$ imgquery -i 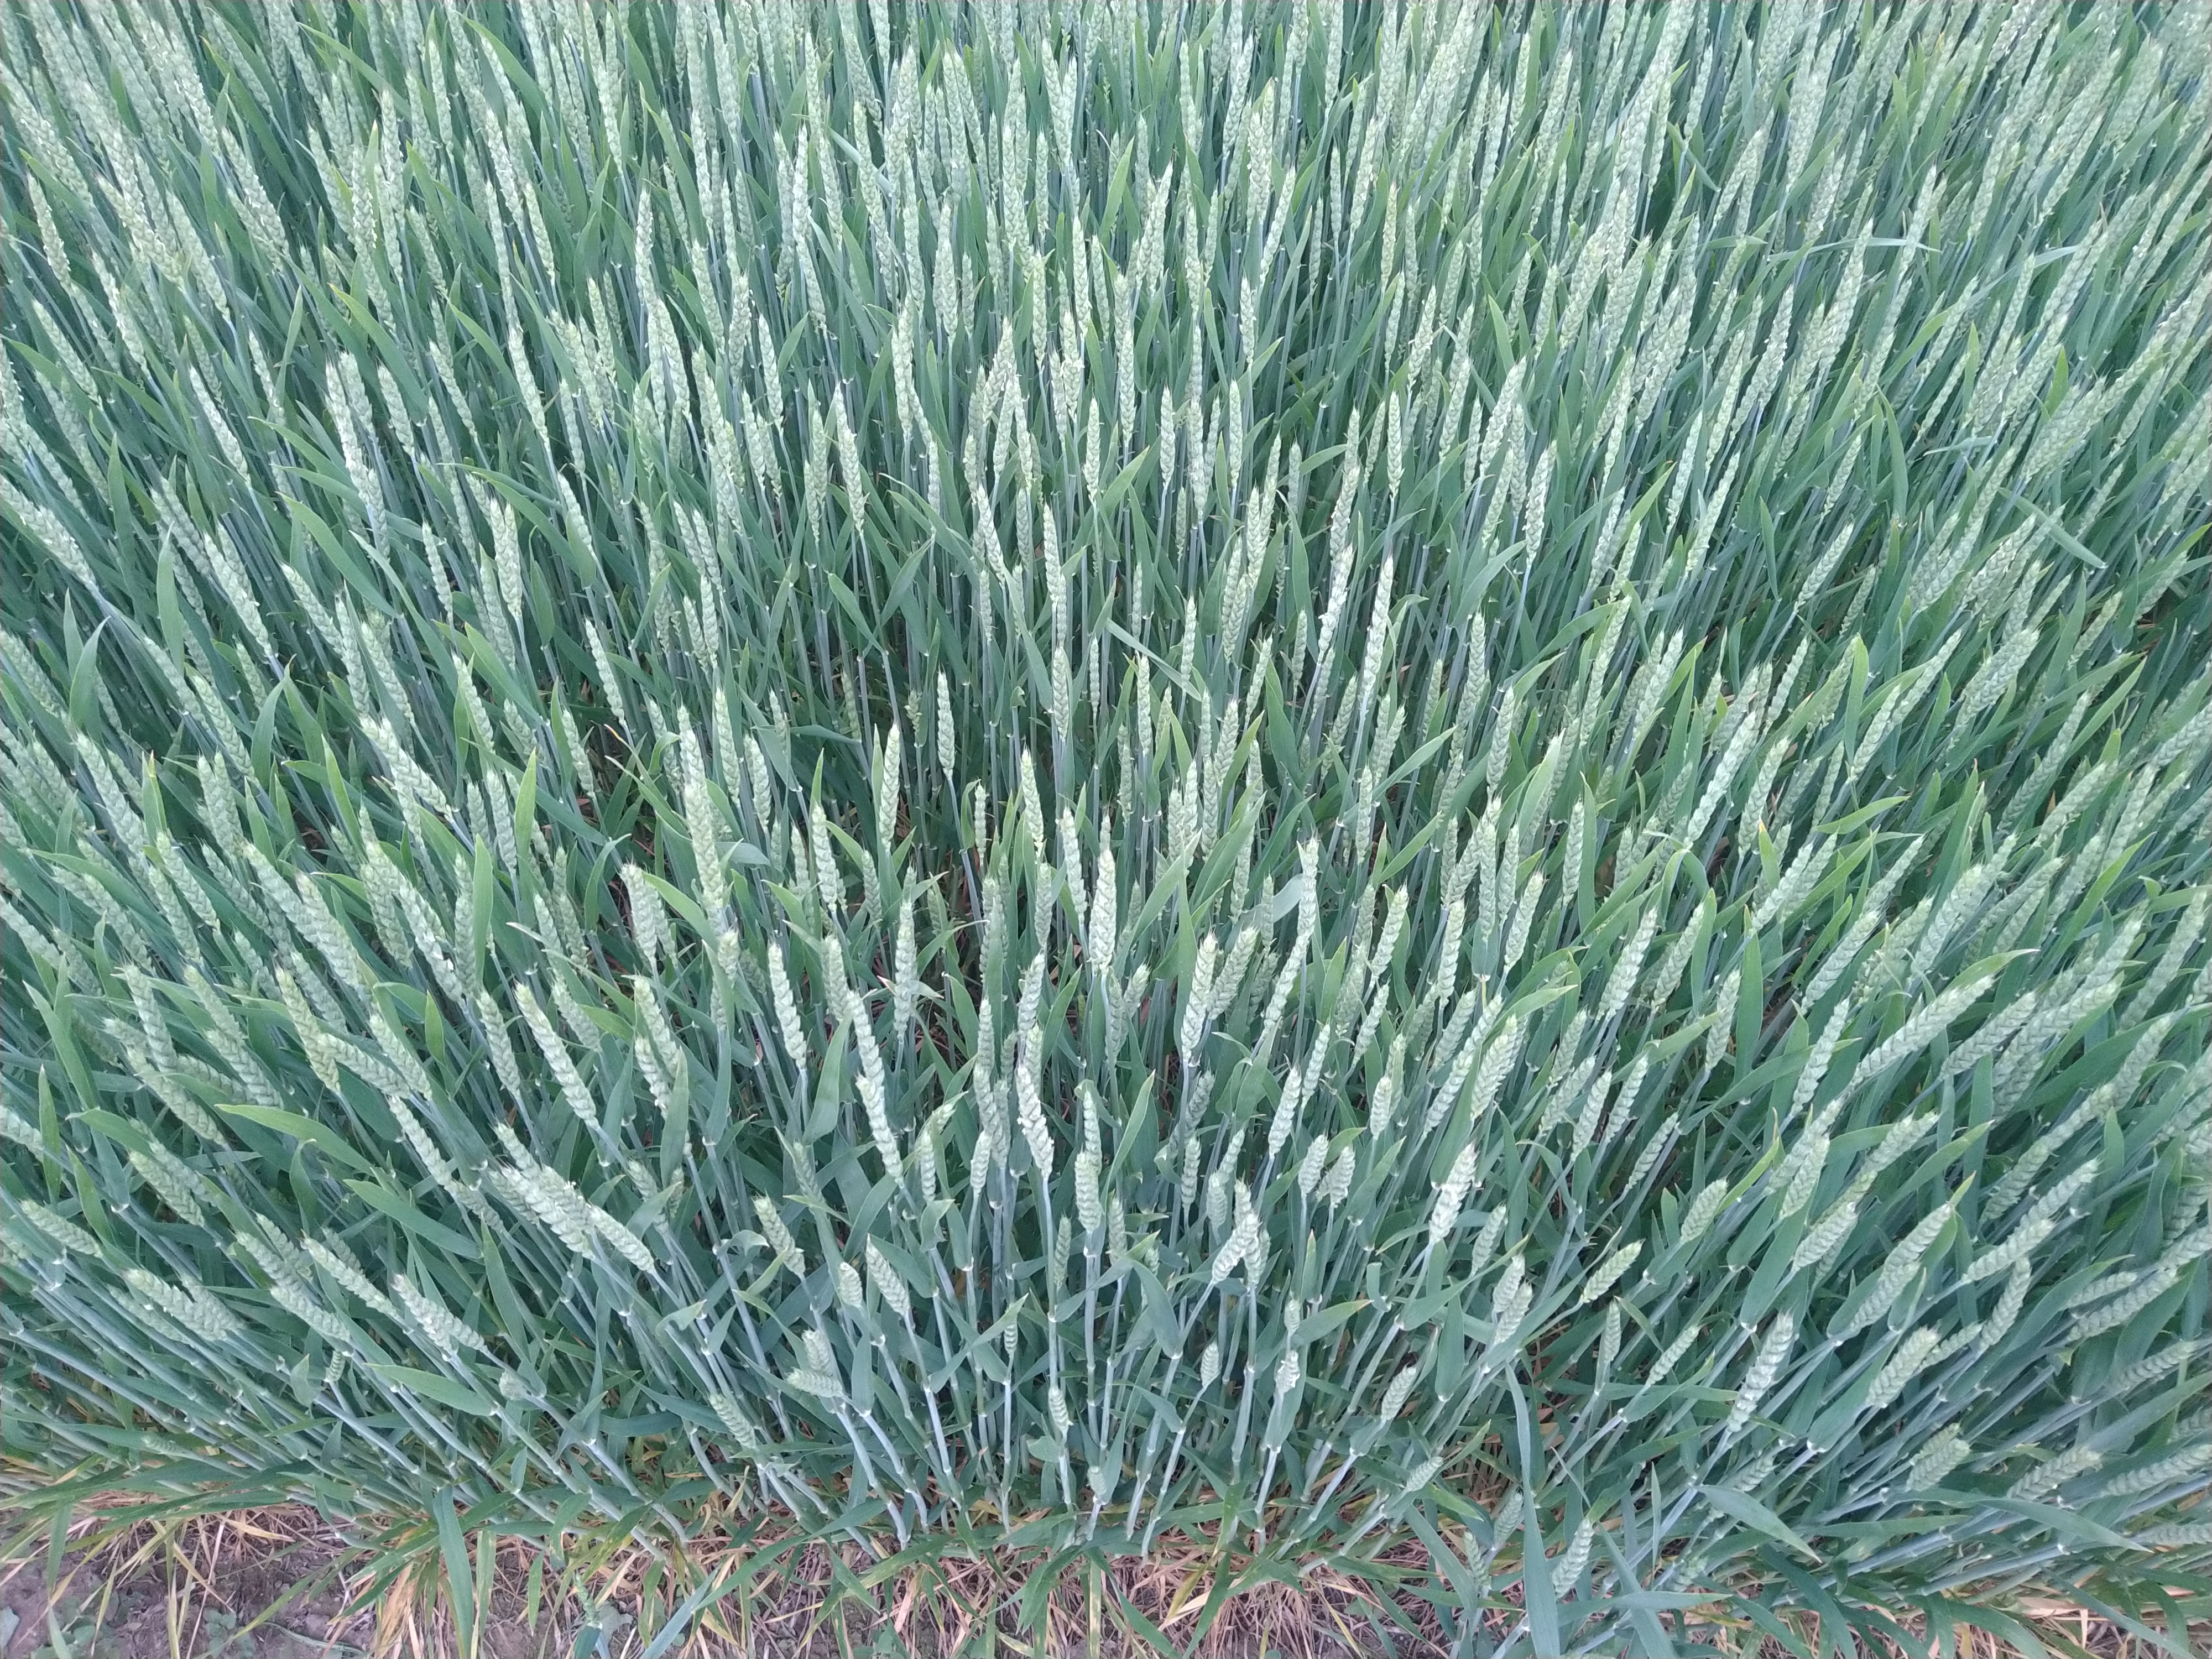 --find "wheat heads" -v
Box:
[0,634,66,716]
[348,105,364,153]
[352,151,375,248]
[903,154,917,206]
[205,1033,285,1110]
[879,724,901,845]
[1352,885,1376,961]
[2015,510,2064,566]
[422,523,453,612]
[561,37,585,113]
[1962,634,2040,722]
[1790,56,1812,143]
[1124,0,1138,33]
[227,192,282,269]
[1138,657,1152,751]
[1288,444,1301,511]
[1569,423,1583,458]
[1479,825,1498,934]
[198,757,236,856]
[1529,180,1548,231]
[331,286,352,322]
[1168,791,1183,863]
[419,1299,486,1347]
[1472,1205,1507,1274]
[1449,307,1474,386]
[505,775,556,866]
[2090,653,2133,696]
[1480,361,1525,469]
[1992,887,2047,955]
[1500,1015,1517,1067]
[1907,515,1958,590]
[1953,300,1985,338]
[909,20,919,61]
[2078,922,2142,995]
[1910,48,1951,139]
[1333,1147,1356,1205]
[125,1047,164,1079]
[1439,1,1464,45]
[244,846,317,941]
[489,499,510,600]
[1298,839,1320,938]
[1593,358,1633,444]
[1469,614,1487,705]
[2004,120,2048,211]
[1351,118,1378,228]
[2002,561,2041,643]
[1686,714,1760,843]
[804,462,819,532]
[927,888,942,936]
[190,372,251,484]
[1652,906,1705,1004]
[1161,166,1173,199]
[776,245,801,284]
[584,620,625,722]
[820,938,831,1006]
[994,381,1014,472]
[105,1020,156,1056]
[1823,435,1862,512]
[380,0,399,36]
[483,783,500,866]
[5,102,51,169]
[551,46,576,138]
[125,1,168,70]
[664,165,690,245]
[268,4,289,85]
[1767,1101,1844,1188]
[0,722,38,769]
[2001,146,2020,182]
[1292,1,1308,68]
[1089,818,1117,973]
[1346,409,1360,470]
[1725,2,1744,70]
[1510,34,1531,126]
[1345,86,1367,172]
[36,374,113,503]
[2163,446,2212,499]
[1750,847,1815,931]
[928,441,941,515]
[1510,0,1525,33]
[430,42,453,144]
[718,932,740,981]
[1498,825,1520,921]
[488,773,517,871]
[1329,468,1360,561]
[467,784,490,845]
[2192,808,2212,841]
[1246,486,1261,565]
[408,207,447,297]
[1043,504,1061,598]
[1404,74,1417,131]
[1587,61,1624,147]
[1017,955,1046,1046]
[739,949,767,994]
[1100,13,1112,53]
[977,367,987,400]
[1382,1367,1418,1420]
[271,464,316,551]
[1833,129,1867,215]
[272,1289,352,1341]
[1083,1091,1102,1175]
[557,476,599,563]
[340,354,374,432]
[1087,1468,1105,1496]
[1684,46,1714,134]
[819,907,836,936]
[1223,105,1250,201]
[0,1238,25,1267]
[1463,400,1482,487]
[2069,764,2118,818]
[1321,0,1332,39]
[1907,818,1950,873]
[2111,1016,2174,1110]
[595,359,614,415]
[1190,1,1203,43]
[998,854,1010,913]
[2035,767,2116,843]
[627,1161,667,1232]
[402,0,421,78]
[440,166,457,229]
[892,332,910,428]
[1202,1344,1220,1384]
[1117,724,1127,762]
[1605,1300,1621,1360]
[32,303,99,398]
[1049,1388,1068,1429]
[1390,71,1407,148]
[1109,1198,1127,1263]
[44,18,102,145]
[980,570,993,638]
[833,387,847,479]
[1424,361,1442,438]
[1752,825,1790,909]
[1660,196,1686,247]
[1738,741,1789,853]
[2101,772,2156,874]
[429,344,477,436]
[149,869,202,963]
[669,403,681,466]
[1510,484,1530,516]
[1293,611,1307,683]
[2067,1272,2181,1341]
[2166,788,2212,840]
[829,938,848,1021]
[953,55,982,153]
[322,247,342,290]
[1706,970,1741,1067]
[1420,660,1443,741]
[742,393,764,480]
[2155,274,2212,354]
[1923,1324,1982,1367]
[839,1263,863,1305]
[1993,1053,2045,1118]
[1458,143,1470,203]
[577,115,596,195]
[1703,1454,1774,1522]
[524,184,555,274]
[793,1143,825,1205]
[812,804,837,904]
[677,707,707,795]
[1404,985,1438,1044]
[780,1,794,51]
[143,641,210,729]
[446,6,481,87]
[1180,43,1194,139]
[2129,1522,2212,1544]
[145,1076,230,1145]
[1257,174,1271,221]
[225,1165,254,1207]
[2083,0,2114,82]
[1795,1203,1858,1266]
[1919,353,1969,430]
[140,127,173,176]
[1279,52,1294,134]
[1652,817,1687,881]
[1004,60,1022,129]
[1580,654,1610,743]
[336,246,356,280]
[455,897,478,994]
[1084,1,1104,67]
[767,945,810,1056]
[1708,239,1747,315]
[205,532,274,654]
[716,484,729,545]
[561,711,594,793]
[1231,0,1241,82]
[819,141,843,240]
[937,204,949,250]
[508,327,548,440]
[1109,133,1120,187]
[1700,672,1722,733]
[579,317,598,368]
[1610,522,1642,600]
[2167,130,2210,201]
[1135,0,1147,42]
[540,1177,593,1233]
[163,1,197,74]
[129,1154,203,1224]
[1878,904,1932,961]
[899,294,913,373]
[1249,953,1279,1016]
[77,840,124,879]
[426,211,440,239]
[0,901,71,972]
[1681,1180,1729,1242]
[2016,24,2059,116]
[1090,638,1100,711]
[1001,1,1015,66]
[699,64,717,144]
[1269,1069,1303,1153]
[1788,308,1832,405]
[1313,648,1337,715]
[1514,1017,1528,1064]
[1371,888,1409,976]
[1091,237,1110,337]
[665,590,682,634]
[1890,362,1927,411]
[787,1371,845,1396]
[2153,465,2208,540]
[814,0,832,61]
[2040,838,2103,939]
[318,312,334,340]
[1914,550,1950,602]
[354,973,374,1008]
[100,0,168,119]
[0,423,28,463]
[574,1574,598,1625]
[342,502,370,548]
[1324,1,1344,103]
[1721,42,1751,120]
[111,131,146,217]
[1808,154,1833,221]
[1548,1010,1587,1083]
[1401,49,1446,148]
[198,278,214,315]
[978,999,995,1072]
[1054,1216,1072,1284]
[1961,1223,2056,1283]
[515,987,596,1120]
[2161,391,2211,455]
[1210,8,1224,78]
[1728,1315,1796,1430]
[1779,836,1839,920]
[1811,31,1841,88]
[1731,352,1771,433]
[874,0,890,65]
[1694,0,1710,62]
[1994,987,2121,1069]
[975,785,987,860]
[107,751,145,810]
[1181,597,1197,686]
[1549,163,1567,258]
[552,848,568,940]
[536,1,554,39]
[0,802,35,861]
[1562,681,1580,729]
[61,377,84,433]
[179,0,198,42]
[1204,399,1221,485]
[1912,837,2015,973]
[682,2,701,121]
[1831,265,1865,362]
[846,38,882,122]
[1921,177,1946,234]
[533,896,566,1014]
[1823,223,1874,350]
[673,502,703,574]
[982,320,1015,420]
[292,955,349,1031]
[1646,1327,1699,1392]
[560,896,587,969]
[1977,861,2064,927]
[908,0,915,33]
[143,1137,217,1202]
[933,250,944,313]
[1511,405,1527,514]
[657,301,690,410]
[1596,911,1659,1018]
[1587,485,1626,588]
[1861,9,1890,64]
[757,416,783,494]
[170,547,205,618]
[325,367,367,499]
[1773,394,1811,478]
[565,1,585,53]
[708,448,742,532]
[1636,321,1691,423]
[979,880,1008,984]
[1569,232,1602,300]
[942,242,958,335]
[44,3,86,77]
[406,0,426,53]
[635,1039,672,1118]
[1061,808,1086,919]
[1648,82,1671,187]
[1974,338,2023,422]
[2163,290,2195,336]
[1533,897,1561,964]
[1041,41,1067,158]
[1136,117,1150,218]
[1155,850,1166,887]
[1925,283,1975,372]
[1436,0,1468,85]
[1481,450,1514,543]
[2041,67,2071,119]
[1790,1002,1851,1115]
[735,170,755,251]
[1881,1207,1952,1278]
[1678,214,1700,290]
[1657,764,1693,827]
[2167,236,2211,302]
[1117,965,1150,1047]
[1300,734,1310,772]
[1160,388,1176,481]
[1002,128,1017,242]
[909,52,922,145]
[1560,247,1605,345]
[1375,707,1406,784]
[2163,42,2210,104]
[1364,402,1386,478]
[1769,0,1805,92]
[1302,1023,1331,1102]
[1357,766,1374,859]
[1594,766,1614,809]
[478,992,521,1092]
[183,316,224,403]
[382,720,423,846]
[2181,1121,2212,1156]
[1570,29,1583,79]
[2002,0,2058,75]
[368,901,394,955]
[1997,258,2036,348]
[989,114,999,187]
[219,524,247,598]
[484,103,523,221]
[93,668,127,741]
[1391,8,1413,100]
[1965,298,2016,420]
[1549,719,1581,801]
[1016,1067,1049,1176]
[1085,399,1101,493]
[555,1093,598,1128]
[1986,2,2027,66]
[45,507,89,581]
[72,287,123,374]
[1940,996,2037,1076]
[1035,134,1049,230]
[222,130,289,254]
[454,64,485,132]
[2150,1093,2212,1144]
[1867,1329,1939,1405]
[1260,436,1282,538]
[1872,4,1920,98]
[1182,1139,1201,1206]
[491,1171,534,1224]
[2078,462,2125,532]
[1793,529,1817,581]
[1480,90,1507,203]
[862,852,882,923]
[308,130,355,237]
[1628,1113,1679,1187]
[214,754,246,855]
[1850,978,1995,1084]
[1377,8,1398,114]
[75,738,147,851]
[0,6,32,88]
[1552,1519,1595,1598]
[1071,0,1080,52]
[1604,181,1621,220]
[1908,1441,1970,1491]
[2162,681,2201,721]
[608,464,624,517]
[1496,1285,1533,1344]
[1121,744,1133,810]
[1861,840,1924,913]
[1108,983,1124,1056]
[1287,1299,1300,1327]
[1623,14,1651,96]
[1367,697,1391,770]
[2176,165,2212,220]
[316,1,338,36]
[736,2,758,66]
[1132,562,1143,637]
[972,1131,992,1190]
[964,434,977,498]
[1641,242,1672,328]
[2106,200,2147,261]
[1445,803,1501,902]
[1371,1078,1392,1134]
[2099,80,2123,120]
[773,133,795,190]
[1012,566,1024,632]
[1618,0,1642,57]
[1052,649,1069,736]
[1861,1116,1939,1174]
[1456,26,1486,108]
[634,981,679,1079]
[360,721,449,811]
[2047,55,2121,155]
[1626,169,1639,242]
[603,272,623,340]
[1978,568,2016,629]
[1539,1059,1596,1131]
[32,67,57,128]
[1962,630,2031,699]
[2011,412,2038,452]
[1435,992,1476,1066]
[796,238,826,327]
[1050,353,1067,435]
[1849,687,1900,778]
[2168,415,2211,477]
[1016,94,1028,192]
[2045,1086,2115,1151]
[481,38,529,137]
[879,126,894,172]
[398,328,420,371]
[84,877,153,967]
[236,644,267,712]
[705,376,730,466]
[248,332,285,424]
[986,209,999,279]
[303,1240,399,1317]
[1797,307,1826,368]
[28,177,73,292]
[691,352,711,439]
[53,930,107,999]
[519,1,553,105]
[1639,943,1675,997]
[1075,1153,1101,1228]
[842,26,867,110]
[1773,212,1787,254]
[790,827,815,929]
[361,866,414,967]
[1427,78,1457,155]
[1176,120,1205,208]
[1968,118,2010,236]
[1807,0,1824,58]
[465,473,492,522]
[1410,122,1427,173]
[978,140,991,205]
[2066,758,2088,795]
[122,287,168,352]
[143,1436,192,1456]
[1545,691,1568,746]
[396,1277,456,1354]
[97,182,183,282]
[838,0,854,36]
[771,822,782,869]
[587,278,616,378]
[1388,1037,1406,1115]
[1127,882,1142,935]
[550,1,571,38]
[176,1054,254,1102]
[1405,207,1419,299]
[942,56,973,198]
[377,366,414,451]
[1763,639,1809,730]
[281,568,345,655]
[967,395,983,451]
[780,193,795,244]
[1250,483,1277,584]
[2013,346,2063,425]
[2104,49,2160,143]
[758,0,773,68]
[1811,741,1844,832]
[1020,751,1044,842]
[1615,828,1634,888]
[917,152,940,228]
[1065,58,1078,133]
[1058,269,1071,331]
[129,246,175,349]
[1887,636,1963,735]
[150,490,192,565]
[1524,450,1549,564]
[1976,303,1999,365]
[174,50,220,155]
[1840,567,1877,634]
[1661,1558,1708,1592]
[678,713,725,906]
[743,736,753,781]
[1449,684,1471,763]
[1387,392,1402,491]
[712,151,722,234]
[184,968,251,1048]
[2079,809,2114,883]
[1162,0,1175,36]
[552,174,573,227]
[2104,1342,2205,1394]
[804,34,822,140]
[2008,1448,2102,1498]
[1439,242,1465,323]
[2068,592,2122,666]
[1471,1037,1506,1116]
[1782,1138,1830,1216]
[1063,314,1080,412]
[1612,70,1658,175]
[724,11,739,83]
[1215,702,1239,782]
[1603,239,1651,322]
[605,14,618,104]
[0,754,62,828]
[2060,1268,2135,1308]
[1863,42,1891,95]
[2133,551,2189,618]
[1603,399,1630,482]
[1191,327,1203,404]
[1464,1532,1490,1584]
[1814,1171,1876,1226]
[374,165,402,274]
[1430,1145,1478,1242]
[700,577,719,653]
[2051,229,2107,324]
[1856,332,1896,411]
[841,672,861,741]
[849,263,862,302]
[1651,3,1680,97]
[1854,293,1880,349]
[1606,192,1629,286]
[30,748,92,832]
[359,807,380,853]
[1670,0,1692,63]
[2039,121,2102,220]
[709,1395,755,1450]
[1229,828,1253,920]
[1599,597,1632,659]
[1031,435,1043,502]
[1557,226,1586,277]
[1014,379,1032,483]
[256,1214,313,1278]
[0,861,24,898]
[2158,1225,2212,1269]
[1422,1041,1476,1132]
[1334,969,1366,1037]
[1084,151,1094,185]
[1677,17,1696,52]
[758,315,784,422]
[1876,519,1897,578]
[1407,1457,1445,1491]
[1033,0,1051,33]
[1121,41,1131,107]
[1569,144,1600,219]
[1120,332,1135,439]
[123,968,178,1074]
[1437,755,1464,823]
[802,1331,833,1375]
[1542,962,1569,1018]
[1607,1059,1649,1139]
[1204,190,1219,277]
[1994,763,2049,841]
[1548,15,1574,82]
[2143,212,2186,277]
[753,1198,805,1273]
[321,95,353,184]
[232,976,259,1009]
[33,744,70,798]
[182,1276,245,1329]
[1607,268,1642,352]
[431,299,453,366]
[1321,677,1357,775]
[893,902,918,1032]
[696,15,709,47]
[1836,58,1867,122]
[551,313,566,385]
[1137,187,1157,280]
[2186,1356,2212,1378]
[277,972,340,1091]
[2110,369,2165,452]
[1544,439,1555,487]
[0,1224,32,1259]
[1489,537,1499,564]
[1057,574,1067,647]
[683,597,708,664]
[1962,519,2036,600]
[1613,0,1627,36]
[1001,1032,1017,1086]
[1036,483,1044,509]
[620,866,657,958]
[1742,296,1763,363]
[1058,0,1072,28]
[1259,1229,1271,1272]
[172,75,192,116]
[890,61,899,103]
[1264,936,1308,1031]
[322,1228,364,1274]
[2116,892,2209,1033]
[1073,219,1090,330]
[855,1078,905,1186]
[1706,291,1738,363]
[1914,522,1984,607]
[336,598,370,716]
[498,1123,545,1193]
[1471,998,1504,1049]
[648,317,666,423]
[2046,961,2091,1007]
[135,157,182,256]
[506,127,529,189]
[1977,1260,2032,1351]
[1202,761,1219,858]
[73,26,120,126]
[1705,361,1743,468]
[661,110,680,155]
[1440,818,1459,901]
[1753,666,1773,729]
[551,969,566,1037]
[1493,1256,1525,1311]
[691,112,712,224]
[659,212,676,290]
[1206,931,1259,1018]
[1193,484,1210,521]
[331,75,352,145]
[157,837,218,927]
[677,27,684,83]
[388,1097,456,1187]
[1487,689,1515,785]
[21,426,88,514]
[1126,241,1139,290]
[300,247,318,286]
[597,68,622,169]
[1991,1038,2016,1123]
[1966,449,2016,528]
[1260,168,1297,280]
[1157,687,1172,742]
[924,86,936,168]
[85,0,159,122]
[2162,1182,2211,1248]
[1506,251,1532,340]
[1240,278,1254,362]
[320,1035,412,1092]
[1944,0,1974,52]
[1684,457,1740,566]
[1403,392,1423,450]
[635,192,655,308]
[1711,667,1759,750]
[1309,200,1323,285]
[1381,184,1397,284]
[1642,637,1661,706]
[52,868,105,915]
[1521,787,1551,856]
[1438,900,1466,1002]
[370,1018,431,1096]
[1035,863,1052,945]
[1261,876,1274,949]
[1275,527,1286,595]
[707,2,738,132]
[528,849,552,913]
[483,554,515,666]
[873,194,893,297]
[888,107,908,178]
[1033,257,1047,362]
[1016,488,1031,568]
[1734,154,1758,239]
[1213,1216,1260,1281]
[941,0,957,33]
[1876,281,1912,344]
[2135,195,2171,255]
[866,1239,910,1313]
[1594,13,1615,83]
[265,895,300,979]
[972,516,985,570]
[1224,578,1248,656]
[1353,985,1390,1064]
[1002,237,1010,300]
[1946,199,1967,233]
[1796,527,1853,607]
[465,156,489,222]
[85,85,117,141]
[1183,762,1198,860]
[0,1106,75,1165]
[405,75,438,176]
[1861,967,1882,1011]
[503,1165,586,1252]
[1166,1075,1216,1164]
[706,798,734,840]
[2004,320,2068,410]
[1494,1494,1524,1545]
[1208,1128,1245,1209]
[1760,286,1794,401]
[1222,38,1253,150]
[0,69,38,128]
[1953,45,1983,115]
[365,1,387,79]
[470,587,493,643]
[1359,558,1395,706]
[691,244,724,347]
[405,902,460,999]
[355,239,395,330]
[646,7,663,78]
[1220,28,1233,72]
[725,423,745,491]
[1631,820,1659,865]
[1755,110,1774,178]
[1533,266,1558,353]
[1313,1170,1332,1198]
[1797,643,1817,700]
[745,62,749,77]
[1469,213,1482,282]
[337,924,361,965]
[649,557,670,647]
[235,1234,312,1296]
[361,625,414,722]
[1486,44,1503,112]
[1612,665,1647,744]
[2177,68,2212,138]
[1109,0,1124,46]
[812,412,828,500]
[1756,0,1785,80]
[167,194,229,313]
[1181,933,1218,1049]
[1583,1243,1642,1301]
[1025,1027,1043,1096]
[1176,487,1186,553]
[330,827,362,877]
[903,208,925,307]
[835,867,847,911]
[111,291,149,373]
[1572,1071,1612,1155]
[141,1071,144,1082]
[1248,116,1264,217]
[1015,197,1033,275]
[922,1135,936,1202]
[1114,276,1130,356]
[794,127,810,237]
[1771,758,1820,829]
[1505,875,1544,968]
[1208,1176,1227,1223]
[1067,156,1080,213]
[92,253,120,312]
[1629,293,1680,392]
[853,103,875,209]
[2036,387,2079,442]
[1840,183,1873,255]
[453,656,495,751]
[2139,700,2168,744]
[1673,278,1697,365]
[2097,1446,2212,1496]
[1805,156,1846,239]
[2137,774,2187,828]
[2162,327,2211,395]
[2166,1407,2212,1444]
[1939,182,1973,235]
[962,254,975,331]
[567,324,600,413]
[937,673,955,767]
[1807,672,1833,732]
[705,890,723,937]
[1439,361,1471,455]
[1234,1181,1253,1227]
[1868,121,1899,179]
[1330,148,1342,233]
[1200,691,1212,760]
[2119,196,2170,288]
[151,20,169,50]
[1245,638,1274,725]
[1455,25,1474,75]
[363,474,391,559]
[1431,770,1445,814]
[450,1181,504,1230]
[72,1012,121,1065]
[821,968,836,1016]
[161,484,210,568]
[340,60,372,136]
[728,277,751,379]
[1418,1005,1435,1038]
[1800,916,1879,1013]
[1319,545,1354,657]
[202,849,274,933]
[382,91,405,219]
[420,453,438,480]
[796,0,807,47]
[369,614,393,660]
[1384,274,1406,359]
[1534,54,1573,169]
[810,484,828,518]
[2024,87,2087,196]
[1512,701,1529,737]
[1245,1236,1262,1283]
[2115,52,2164,152]
[2089,376,2105,405]
[486,182,513,292]
[1247,739,1262,803]
[451,479,478,563]
[36,372,84,446]
[914,1105,955,1160]
[281,16,322,104]
[1800,313,1811,346]
[1823,641,1858,722]
[722,181,738,270]
[1005,1304,1017,1351]
[1421,0,1439,69]
[1188,401,1203,473]
[234,932,282,1001]
[1262,83,1274,169]
[842,431,865,524]
[907,385,933,445]
[2017,674,2045,741]
[648,702,682,791]
[906,691,920,729]
[504,501,522,612]
[974,1065,1005,1160]
[246,1,272,62]
[1815,1221,1856,1282]
[2093,329,2168,420]
[1634,633,1686,733]
[1407,288,1437,382]
[213,17,272,114]
[1471,296,1488,345]
[2011,1161,2099,1234]
[194,680,257,782]
[1090,123,1101,180]
[2027,575,2072,629]
[2067,837,2104,892]
[126,1271,228,1339]
[1715,134,1760,218]
[630,80,641,153]
[454,855,475,905]
[715,689,740,798]
[1628,556,1673,640]
[328,1349,345,1380]
[0,486,95,583]
[1849,1265,1922,1328]
[1920,1,1946,52]
[897,60,910,109]
[645,883,677,962]
[639,502,673,566]
[979,1,998,52]
[972,45,984,111]
[364,847,449,942]
[36,122,90,197]
[633,387,654,475]
[32,3,75,113]
[2043,696,2092,781]
[847,992,885,1087]
[750,737,772,826]
[589,1206,653,1268]
[2023,390,2102,472]
[1185,209,1200,306]
[1563,81,1581,132]
[0,338,27,430]
[668,1169,684,1218]
[936,90,951,177]
[1470,71,1490,155]
[2153,701,2212,766]
[1148,196,1172,285]
[1851,953,1881,1004]
[165,67,182,123]
[583,2,604,76]
[1563,802,1585,902]
[1141,1249,1159,1310]
[179,615,214,684]
[198,0,219,50]
[976,486,1005,581]
[1898,170,1938,274]
[2187,955,2212,1002]
[1221,538,1243,628]
[1917,1424,1961,1458]
[1704,332,1744,418]
[296,876,364,987]
[711,968,728,1028]
[1092,533,1099,575]
[1299,1136,1328,1191]
[504,700,546,762]
[2137,94,2157,127]
[692,509,722,588]
[1023,0,1035,42]
[559,381,585,471]
[772,274,790,301]
[769,689,787,751]
[107,1286,190,1341]
[952,168,965,204]
[127,858,164,909]
[21,1202,102,1255]
[1666,412,1702,530]
[428,397,457,485]
[2008,41,2036,97]
[1976,1094,2142,1220]
[905,866,916,893]
[1229,382,1243,481]
[1845,0,1858,33]
[1442,137,1464,214]
[1787,83,1822,184]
